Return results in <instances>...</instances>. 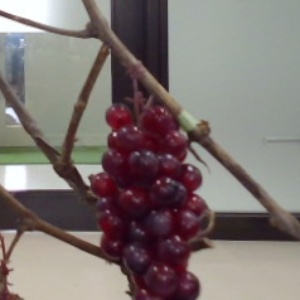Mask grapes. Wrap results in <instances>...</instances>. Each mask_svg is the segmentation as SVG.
<instances>
[{
    "mask_svg": "<svg viewBox=\"0 0 300 300\" xmlns=\"http://www.w3.org/2000/svg\"><path fill=\"white\" fill-rule=\"evenodd\" d=\"M104 123L112 129L100 160L104 173L89 177L104 212L97 219L103 255L124 261L132 300H196L201 282L186 270L188 241L205 230L210 206L193 194L202 171L186 163L188 138L162 106L144 108L134 120L127 103L113 102Z\"/></svg>",
    "mask_w": 300,
    "mask_h": 300,
    "instance_id": "01657485",
    "label": "grapes"
}]
</instances>
